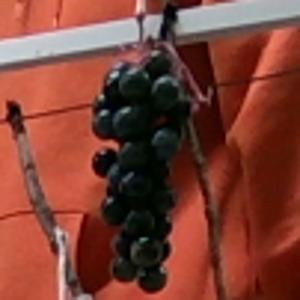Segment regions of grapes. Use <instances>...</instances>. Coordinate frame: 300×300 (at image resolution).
<instances>
[{"instance_id":"01657485","label":"grapes","mask_w":300,"mask_h":300,"mask_svg":"<svg viewBox=\"0 0 300 300\" xmlns=\"http://www.w3.org/2000/svg\"><path fill=\"white\" fill-rule=\"evenodd\" d=\"M179 72L175 54L166 48L147 51L139 63L116 60L90 102L91 136L116 142V148L98 147L89 160L91 174L107 182L99 220L117 231L110 273L121 284L136 281L147 295L163 293L171 279V211L182 201L171 175L174 156L191 140L194 107L188 80Z\"/></svg>"}]
</instances>
